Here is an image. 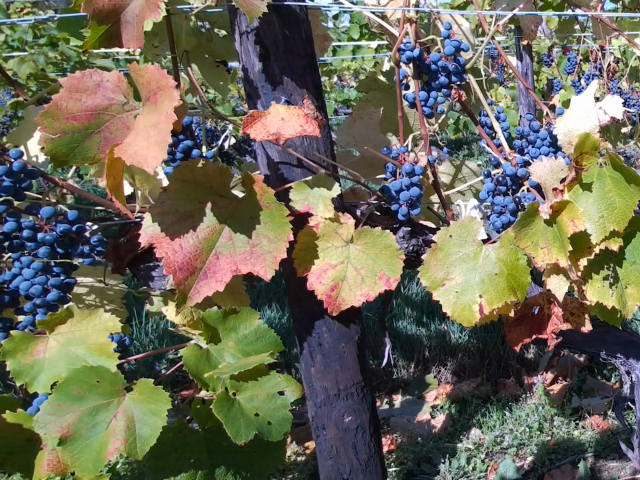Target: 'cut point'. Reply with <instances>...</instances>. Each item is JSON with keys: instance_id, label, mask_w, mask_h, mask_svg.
Instances as JSON below:
<instances>
[{"instance_id": "6a23745f", "label": "cut point", "mask_w": 640, "mask_h": 480, "mask_svg": "<svg viewBox=\"0 0 640 480\" xmlns=\"http://www.w3.org/2000/svg\"><path fill=\"white\" fill-rule=\"evenodd\" d=\"M430 39H436L437 41H440V37L435 36L433 34H430V36H427L425 38H419V39H417V41H418V43H420L421 41H427V40H430Z\"/></svg>"}, {"instance_id": "7d7e1d6f", "label": "cut point", "mask_w": 640, "mask_h": 480, "mask_svg": "<svg viewBox=\"0 0 640 480\" xmlns=\"http://www.w3.org/2000/svg\"><path fill=\"white\" fill-rule=\"evenodd\" d=\"M55 188H57L56 186H51L49 187L41 196V200L46 201V196L47 194H49V192H51L52 190H54Z\"/></svg>"}]
</instances>
